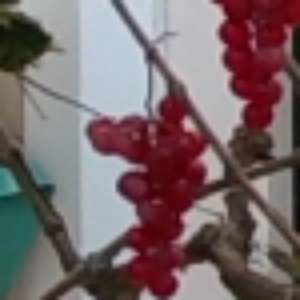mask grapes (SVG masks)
<instances>
[{
    "label": "grapes",
    "instance_id": "obj_2",
    "mask_svg": "<svg viewBox=\"0 0 300 300\" xmlns=\"http://www.w3.org/2000/svg\"><path fill=\"white\" fill-rule=\"evenodd\" d=\"M228 17L216 28L218 39L227 47L221 54L224 69L233 74L230 92L247 101L241 117L257 130L273 121L271 106L285 93L283 82L274 77L288 63L282 47L287 40L285 26L300 25V0H211Z\"/></svg>",
    "mask_w": 300,
    "mask_h": 300
},
{
    "label": "grapes",
    "instance_id": "obj_1",
    "mask_svg": "<svg viewBox=\"0 0 300 300\" xmlns=\"http://www.w3.org/2000/svg\"><path fill=\"white\" fill-rule=\"evenodd\" d=\"M157 113L159 119L148 120L130 113L117 124L99 115L89 122L87 134L98 154L147 164L148 172L122 173L115 190L122 200L136 205L141 222L126 235L128 247L139 254L130 263V276L138 284H149L156 298L168 300L179 291L175 272L186 259L177 242L184 231L181 217L193 208L194 194L209 178L207 166L196 159L206 151L208 140L199 131L184 130L187 105L182 98L163 96Z\"/></svg>",
    "mask_w": 300,
    "mask_h": 300
}]
</instances>
